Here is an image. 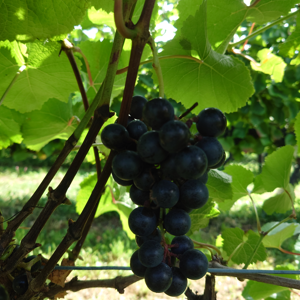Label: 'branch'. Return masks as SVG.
Segmentation results:
<instances>
[{
	"mask_svg": "<svg viewBox=\"0 0 300 300\" xmlns=\"http://www.w3.org/2000/svg\"><path fill=\"white\" fill-rule=\"evenodd\" d=\"M112 158L113 154L110 150L103 171L100 173L99 179L97 180L91 195L86 200L85 207L80 216L76 222L73 220L68 222L69 227L67 233L62 238L59 246L50 255L47 264L28 282L26 291L19 296L17 300H28L32 297L34 292L46 293V296L51 298L55 294L66 290L77 292L86 288H115L119 294H123L125 289L134 285L137 281L144 279L143 277L132 274L125 277L117 276L114 279L78 280V275H76L69 282H61L62 279L70 272V269L74 265L75 260L77 259V256L88 237L93 219L98 209L99 201L106 189L105 184L111 175ZM74 242L76 243L69 258L65 262L63 269L56 275L53 281L40 285L44 279L53 272L55 265L67 251L69 246Z\"/></svg>",
	"mask_w": 300,
	"mask_h": 300,
	"instance_id": "branch-2",
	"label": "branch"
},
{
	"mask_svg": "<svg viewBox=\"0 0 300 300\" xmlns=\"http://www.w3.org/2000/svg\"><path fill=\"white\" fill-rule=\"evenodd\" d=\"M155 4L156 0H145L138 21L133 23L132 16L137 5V0H114V23L116 26V33L114 35V43L111 48L104 81L97 90L92 103L86 109L81 122L75 127L74 131L65 142L56 161L51 166L38 188L31 194L23 208L17 213L16 217L7 223L2 237L0 238V253L5 251L11 239L15 236L16 230L34 211L37 203L43 196L44 191L48 188V201L46 202L44 209L37 217L29 232L21 239L20 243L14 247L13 251L6 256V259L0 263V277L8 275L27 253L32 252L38 247L36 239L40 235L41 229L44 227L51 214L55 211V208L62 203L64 205L69 203V199L66 197L67 189L73 181L81 164L84 162V158L88 154V151L96 142V138L100 134L105 122L115 115V112L109 111L110 97L115 84L114 79L117 76L119 57L122 54L125 39H131L132 49L129 57L126 82L123 89V100L120 104L118 117V123L127 127V120L134 94V86L140 67V59L144 47L147 44V39L152 37L149 32V27ZM92 116L94 118L93 123L90 126L84 141L80 144L77 154L73 157L69 169L64 178L54 189H52V187H49L50 183L67 156L79 142L80 137Z\"/></svg>",
	"mask_w": 300,
	"mask_h": 300,
	"instance_id": "branch-1",
	"label": "branch"
}]
</instances>
